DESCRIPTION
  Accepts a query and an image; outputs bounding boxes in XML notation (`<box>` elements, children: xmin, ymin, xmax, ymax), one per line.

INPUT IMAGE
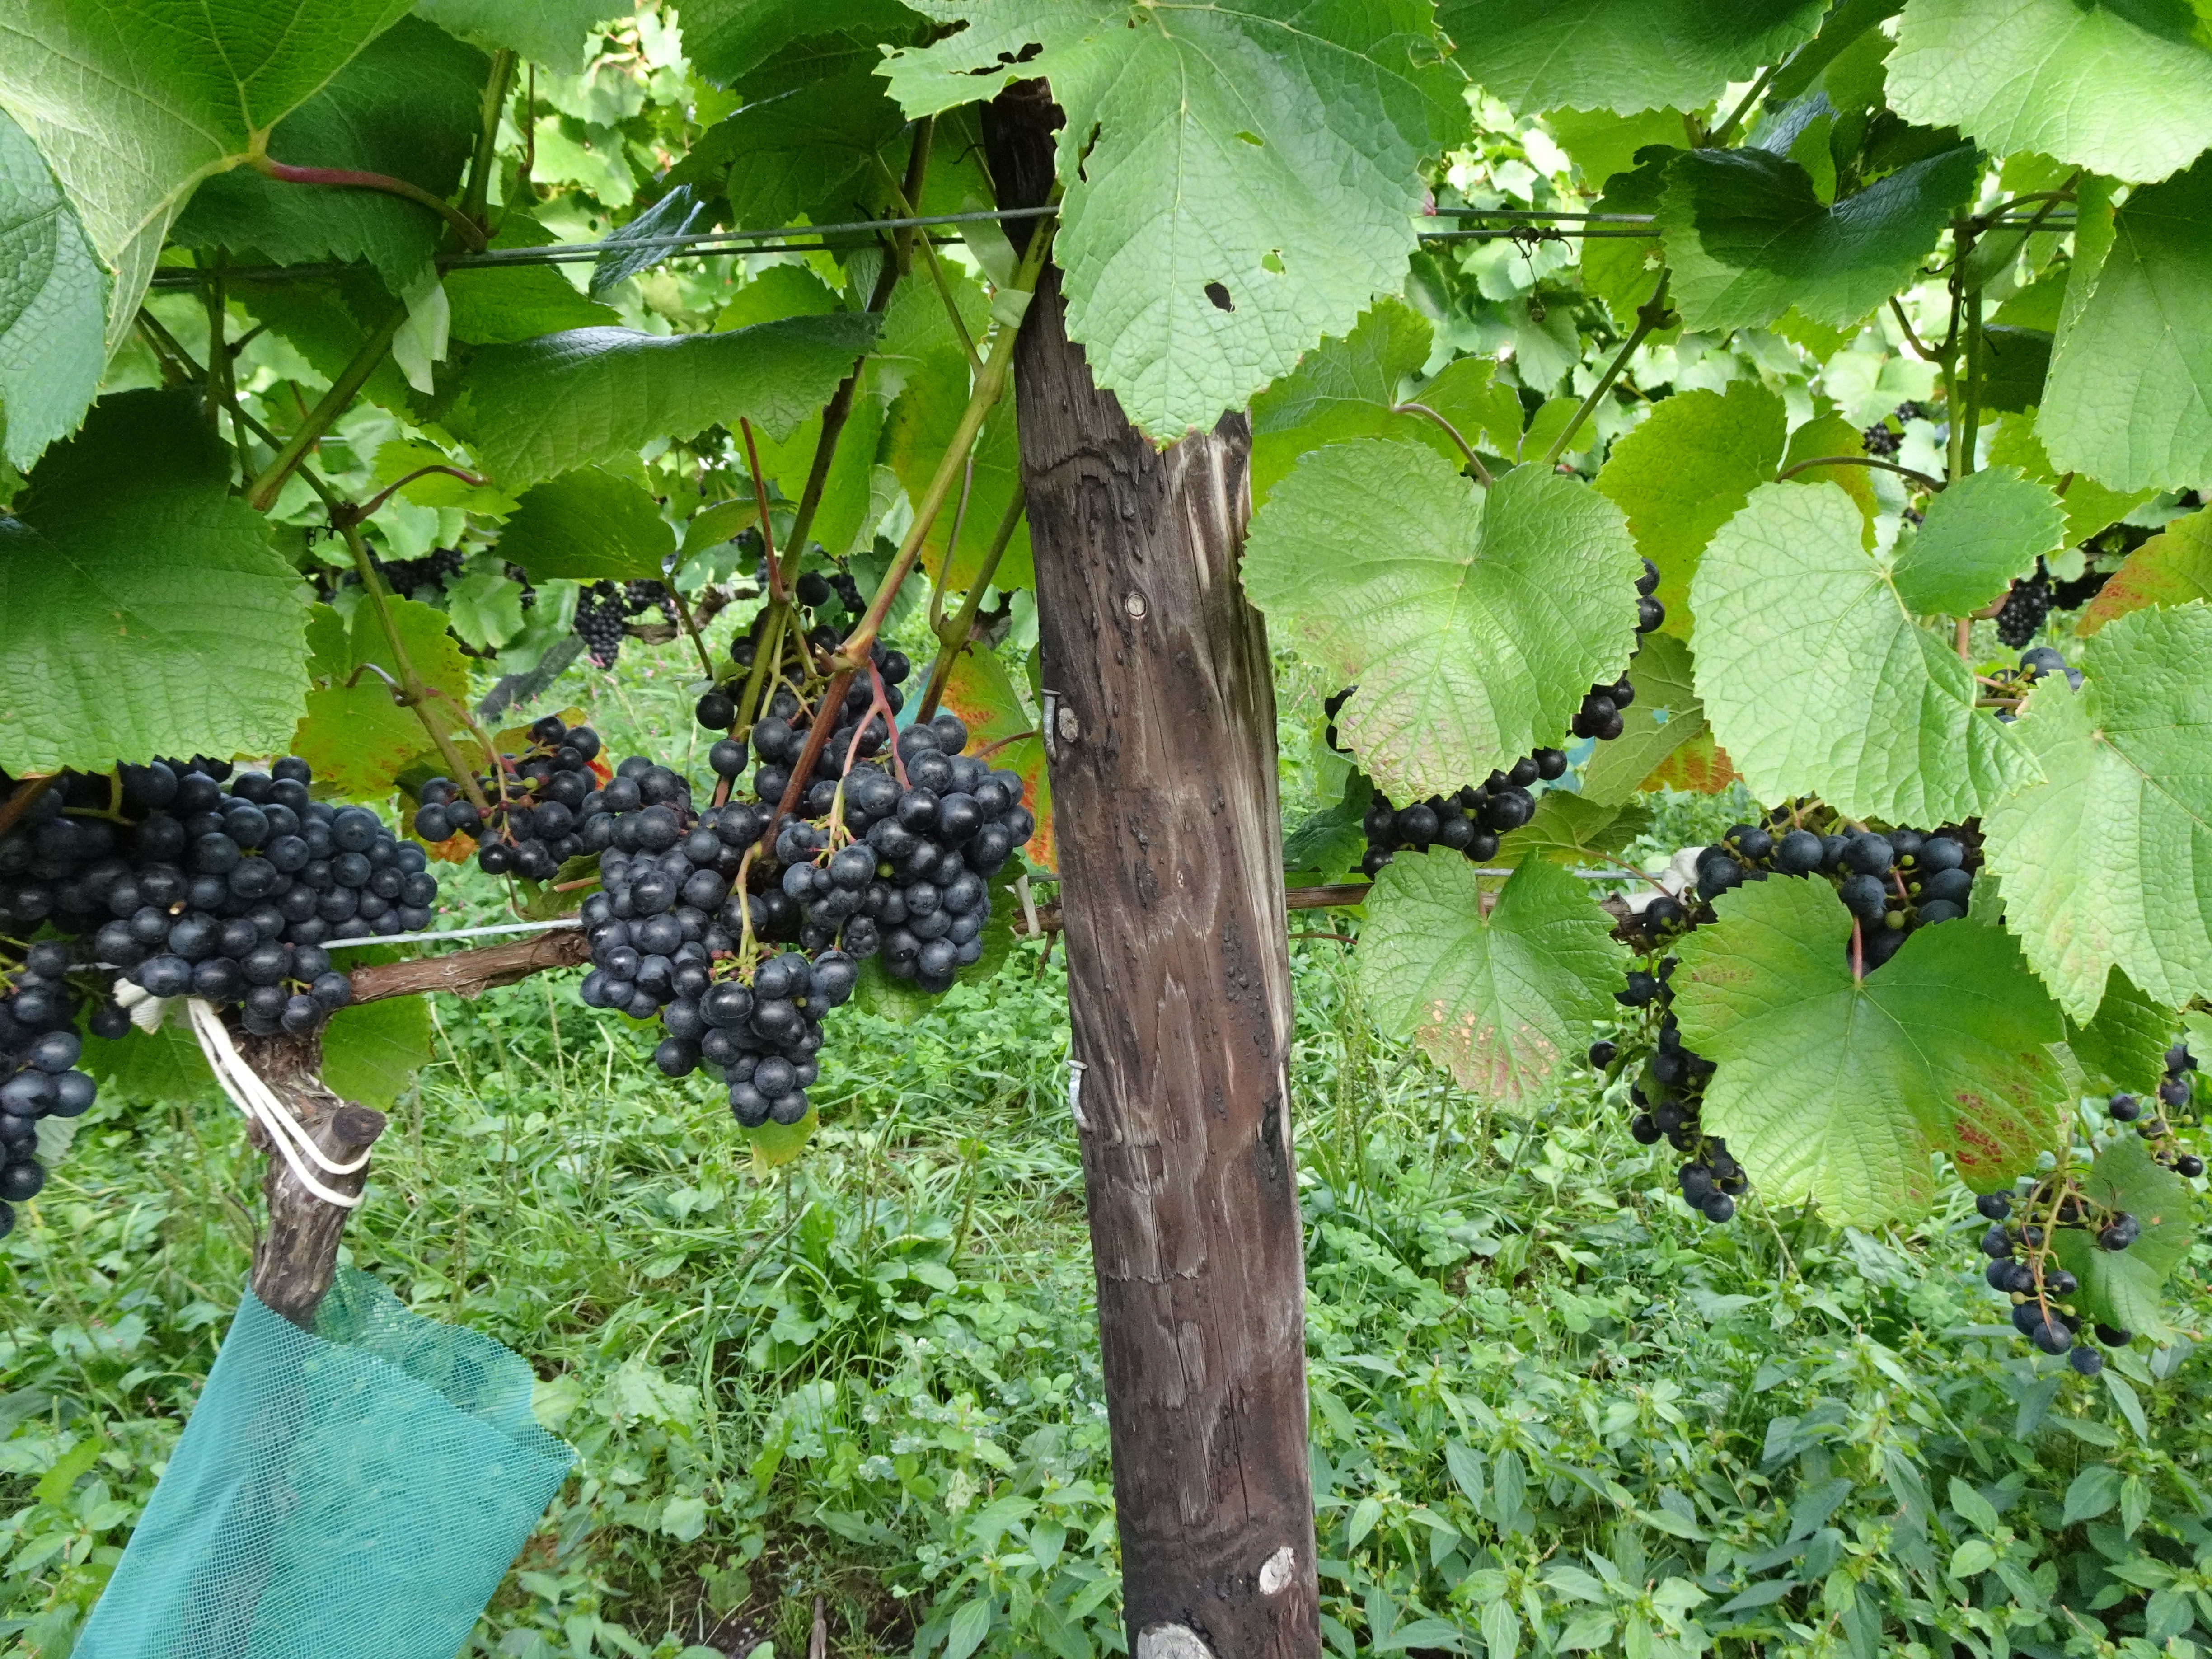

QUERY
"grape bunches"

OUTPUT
<box><xmin>1648</xmin><ymin>824</ymin><xmax>1848</xmax><ymax>959</ymax></box>
<box><xmin>811</xmin><ymin>716</ymin><xmax>1033</xmax><ymax>991</ymax></box>
<box><xmin>1841</xmin><ymin>828</ymin><xmax>1974</xmax><ymax>971</ymax></box>
<box><xmin>778</xmin><ymin>820</ymin><xmax>883</xmax><ymax>955</ymax></box>
<box><xmin>2109</xmin><ymin>1043</ymin><xmax>2203</xmax><ymax>1177</ymax></box>
<box><xmin>276</xmin><ymin>801</ymin><xmax>437</xmax><ymax>940</ymax></box>
<box><xmin>695</xmin><ymin>571</ymin><xmax>910</xmax><ymax>807</ymax></box>
<box><xmin>93</xmin><ymin>753</ymin><xmax>354</xmax><ymax>1037</ymax></box>
<box><xmin>579</xmin><ymin>756</ymin><xmax>805</xmax><ymax>1020</ymax></box>
<box><xmin>656</xmin><ymin>953</ymin><xmax>858</xmax><ymax>1125</ymax></box>
<box><xmin>1590</xmin><ymin>960</ymin><xmax>1747</xmax><ymax>1222</ymax></box>
<box><xmin>1986</xmin><ymin>648</ymin><xmax>2087</xmax><ymax>723</ymax></box>
<box><xmin>1325</xmin><ymin>688</ymin><xmax>1567</xmax><ymax>881</ymax></box>
<box><xmin>0</xmin><ymin>934</ymin><xmax>134</xmax><ymax>1240</ymax></box>
<box><xmin>1564</xmin><ymin>559</ymin><xmax>1664</xmax><ymax>740</ymax></box>
<box><xmin>414</xmin><ymin>716</ymin><xmax>598</xmax><ymax>884</ymax></box>
<box><xmin>1977</xmin><ymin>1184</ymin><xmax>2139</xmax><ymax>1375</ymax></box>
<box><xmin>1</xmin><ymin>769</ymin><xmax>118</xmax><ymax>941</ymax></box>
